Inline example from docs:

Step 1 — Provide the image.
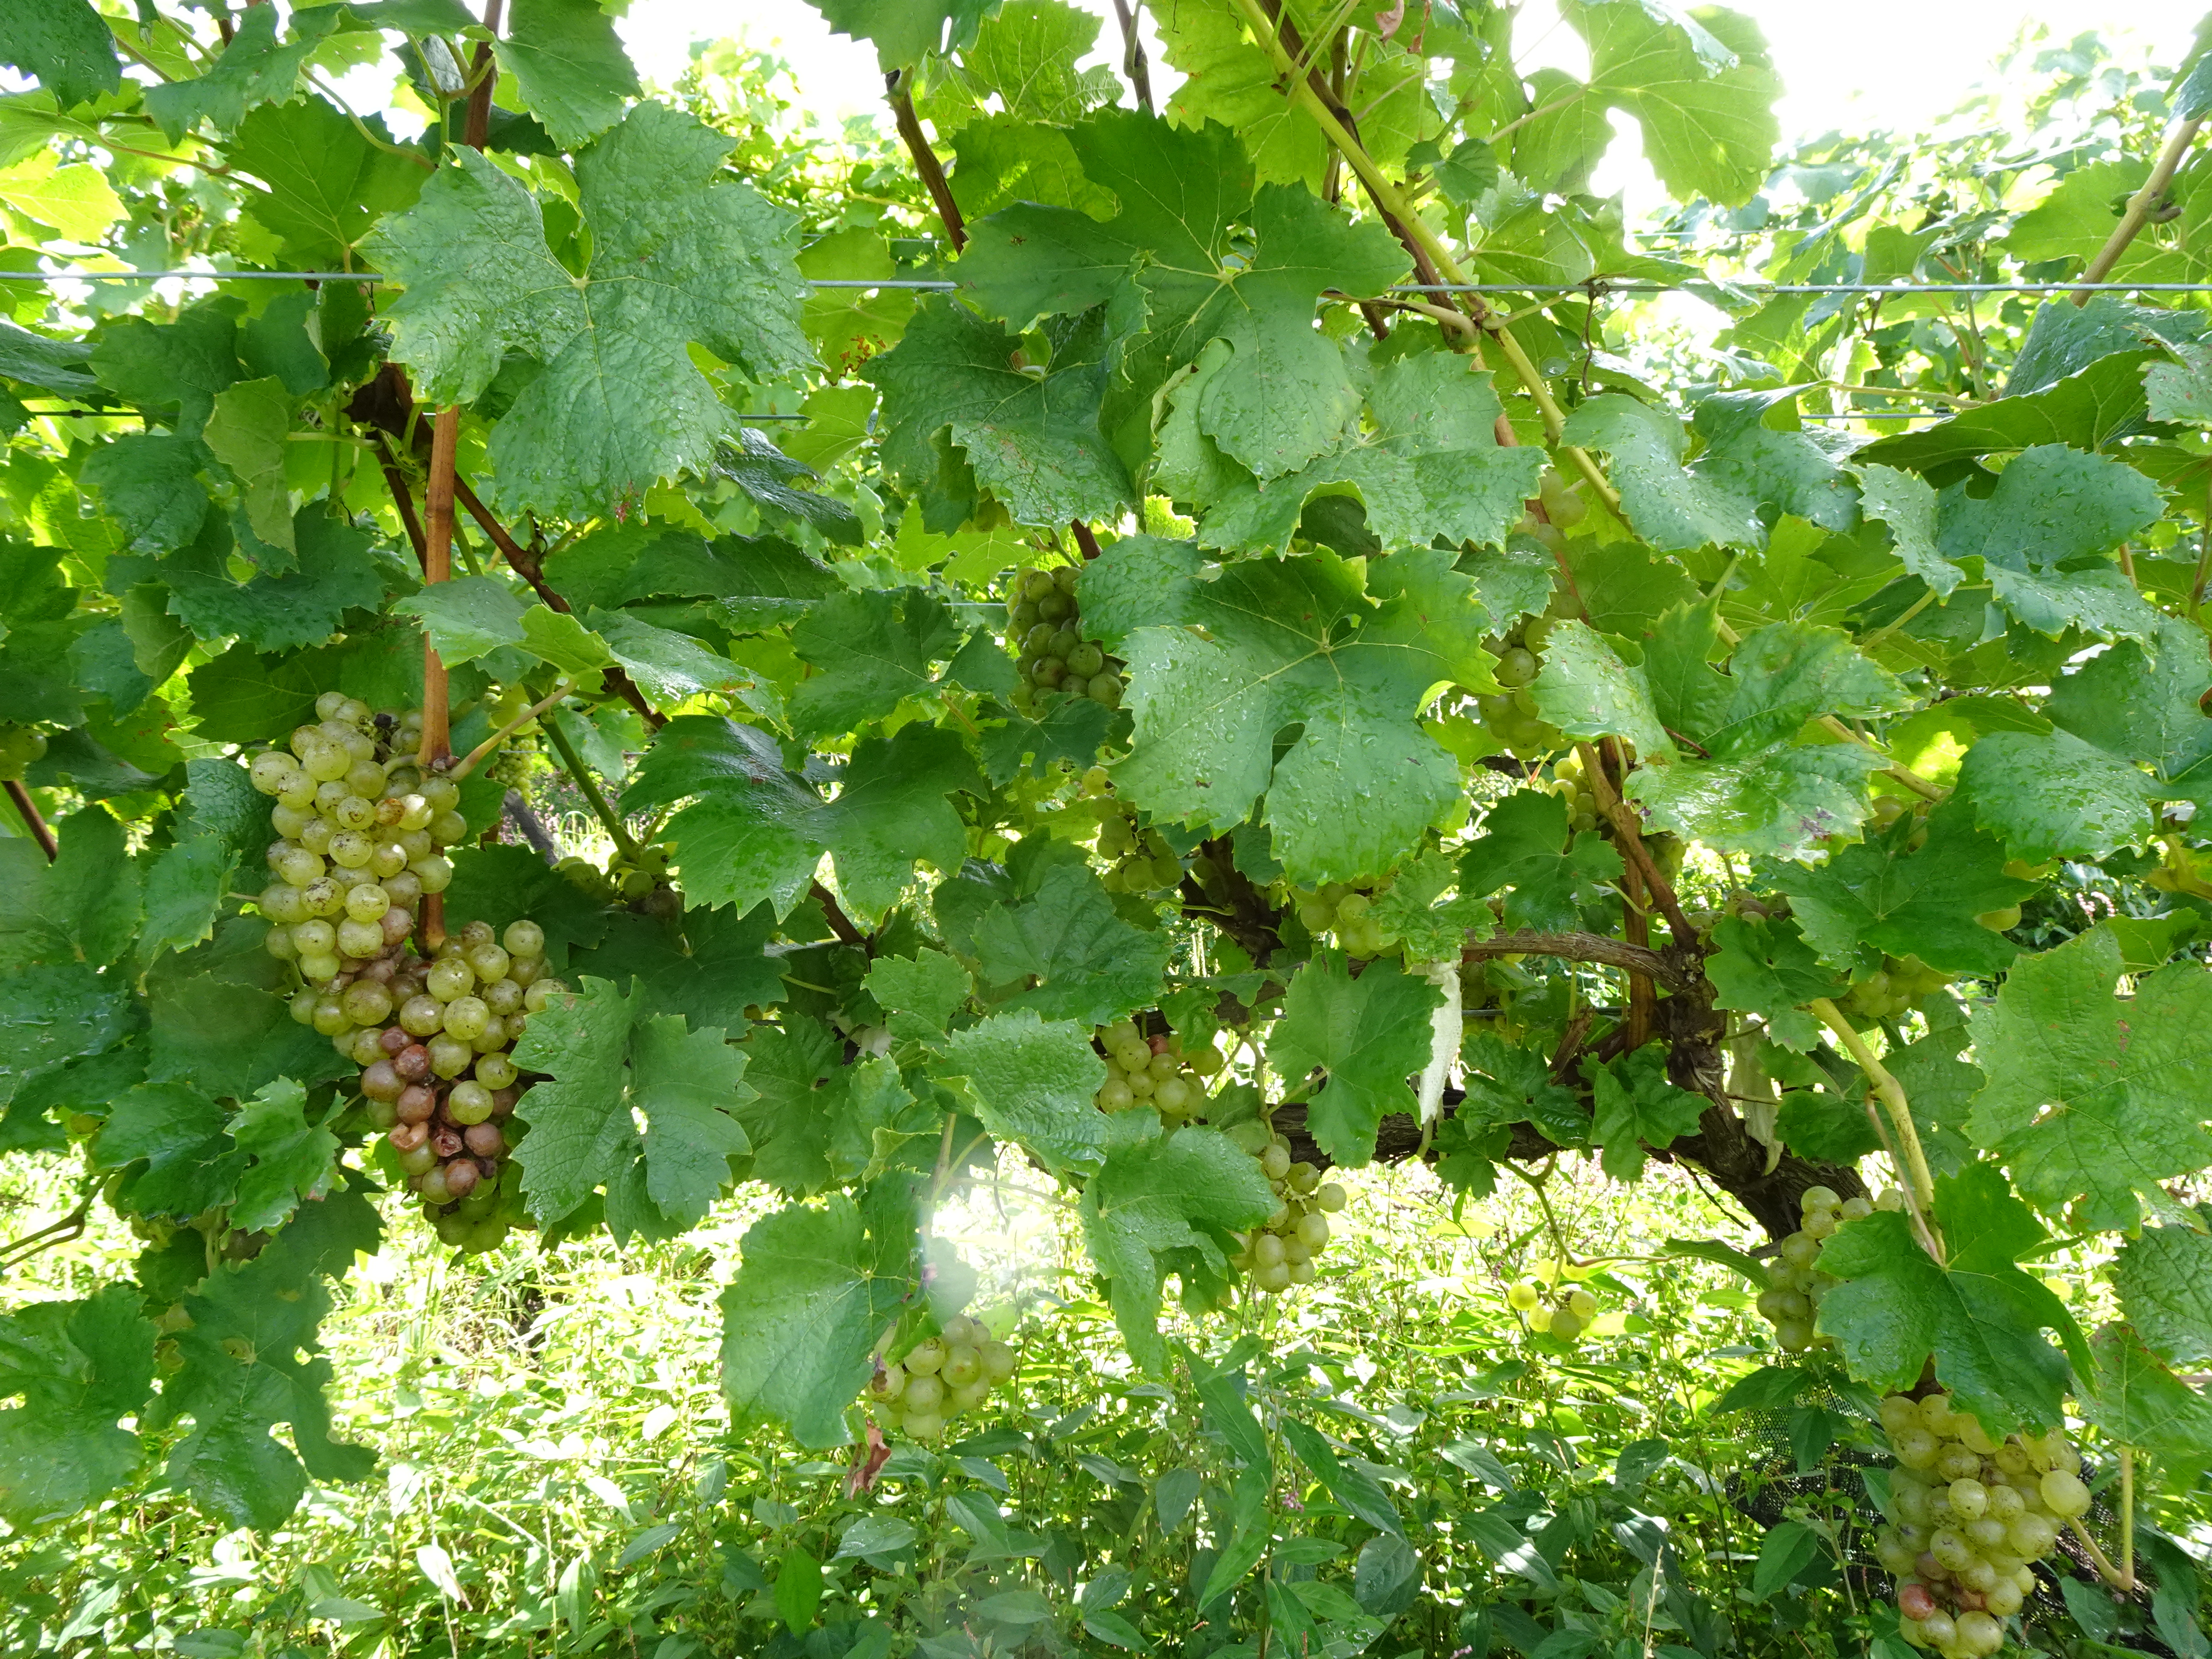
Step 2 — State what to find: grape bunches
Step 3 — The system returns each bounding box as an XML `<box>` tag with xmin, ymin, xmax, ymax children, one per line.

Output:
<box><xmin>1466</xmin><ymin>470</ymin><xmax>1588</xmax><ymax>761</ymax></box>
<box><xmin>1277</xmin><ymin>873</ymin><xmax>1405</xmax><ymax>961</ymax></box>
<box><xmin>956</xmin><ymin>487</ymin><xmax>1012</xmax><ymax>533</ymax></box>
<box><xmin>186</xmin><ymin>1201</ymin><xmax>273</xmax><ymax>1261</ymax></box>
<box><xmin>1092</xmin><ymin>1022</ymin><xmax>1223</xmax><ymax>1129</ymax></box>
<box><xmin>154</xmin><ymin>1280</ymin><xmax>201</xmax><ymax>1333</ymax></box>
<box><xmin>1639</xmin><ymin>830</ymin><xmax>1686</xmax><ymax>904</ymax></box>
<box><xmin>1850</xmin><ymin>796</ymin><xmax>2048</xmax><ymax>1018</ymax></box>
<box><xmin>250</xmin><ymin>692</ymin><xmax>466</xmax><ymax>982</ymax></box>
<box><xmin>1006</xmin><ymin>566</ymin><xmax>1124</xmax><ymax>720</ymax></box>
<box><xmin>1229</xmin><ymin>1133</ymin><xmax>1347</xmax><ymax>1293</ymax></box>
<box><xmin>1550</xmin><ymin>734</ymin><xmax>1628</xmax><ymax>833</ymax></box>
<box><xmin>866</xmin><ymin>1306</ymin><xmax>1015</xmax><ymax>1439</ymax></box>
<box><xmin>446</xmin><ymin>684</ymin><xmax>538</xmax><ymax>735</ymax></box>
<box><xmin>1874</xmin><ymin>1388</ymin><xmax>2092</xmax><ymax>1659</ymax></box>
<box><xmin>1081</xmin><ymin>765</ymin><xmax>1184</xmax><ymax>892</ymax></box>
<box><xmin>69</xmin><ymin>1112</ymin><xmax>176</xmax><ymax>1244</ymax></box>
<box><xmin>1509</xmin><ymin>1251</ymin><xmax>1598</xmax><ymax>1345</ymax></box>
<box><xmin>1193</xmin><ymin>855</ymin><xmax>1225</xmax><ymax>907</ymax></box>
<box><xmin>550</xmin><ymin>843</ymin><xmax>680</xmax><ymax>920</ymax></box>
<box><xmin>1757</xmin><ymin>1186</ymin><xmax>1903</xmax><ymax>1352</ymax></box>
<box><xmin>1685</xmin><ymin>888</ymin><xmax>1792</xmax><ymax>931</ymax></box>
<box><xmin>1459</xmin><ymin>953</ymin><xmax>1527</xmax><ymax>1052</ymax></box>
<box><xmin>0</xmin><ymin>725</ymin><xmax>48</xmax><ymax>782</ymax></box>
<box><xmin>290</xmin><ymin>920</ymin><xmax>570</xmax><ymax>1256</ymax></box>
